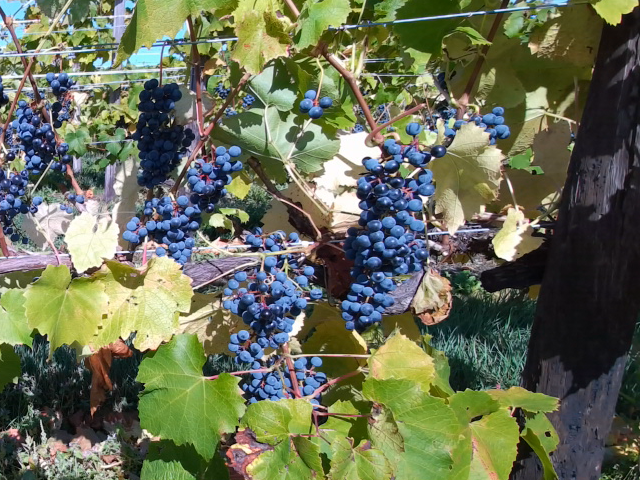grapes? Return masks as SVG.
<instances>
[{
  "label": "grapes",
  "instance_id": "obj_4",
  "mask_svg": "<svg viewBox=\"0 0 640 480\" xmlns=\"http://www.w3.org/2000/svg\"><path fill=\"white\" fill-rule=\"evenodd\" d=\"M183 98L176 83L158 87L156 79L147 80L139 94L138 110L142 112L132 138L137 141V157L143 168L136 179L139 187L153 189L167 178L181 156L193 147L195 134L178 123L167 126V114Z\"/></svg>",
  "mask_w": 640,
  "mask_h": 480
},
{
  "label": "grapes",
  "instance_id": "obj_9",
  "mask_svg": "<svg viewBox=\"0 0 640 480\" xmlns=\"http://www.w3.org/2000/svg\"><path fill=\"white\" fill-rule=\"evenodd\" d=\"M317 98V91L315 89H308L303 100L298 105V111L300 113H307V117L312 120H319L323 116V108H329L334 104V97L329 95L321 96L319 98V107L314 106Z\"/></svg>",
  "mask_w": 640,
  "mask_h": 480
},
{
  "label": "grapes",
  "instance_id": "obj_11",
  "mask_svg": "<svg viewBox=\"0 0 640 480\" xmlns=\"http://www.w3.org/2000/svg\"><path fill=\"white\" fill-rule=\"evenodd\" d=\"M283 237H287L288 236V240L289 241H300L301 237L295 233V232H291L289 235L285 230L282 229H278L277 232H274L273 234L269 235V238H267L265 240V246H266V251L267 252H279L282 250V246L279 245V240L281 239V236Z\"/></svg>",
  "mask_w": 640,
  "mask_h": 480
},
{
  "label": "grapes",
  "instance_id": "obj_8",
  "mask_svg": "<svg viewBox=\"0 0 640 480\" xmlns=\"http://www.w3.org/2000/svg\"><path fill=\"white\" fill-rule=\"evenodd\" d=\"M297 374L296 381H304V386H299V392L302 397L313 395L318 387L328 382V376L325 372H314L311 376L307 375L306 370L309 368V360L305 357H299L293 362Z\"/></svg>",
  "mask_w": 640,
  "mask_h": 480
},
{
  "label": "grapes",
  "instance_id": "obj_10",
  "mask_svg": "<svg viewBox=\"0 0 640 480\" xmlns=\"http://www.w3.org/2000/svg\"><path fill=\"white\" fill-rule=\"evenodd\" d=\"M46 80L49 83L52 94L56 97H61L64 92L74 85V81L69 79V75L66 72L59 73L57 76L53 72H48Z\"/></svg>",
  "mask_w": 640,
  "mask_h": 480
},
{
  "label": "grapes",
  "instance_id": "obj_6",
  "mask_svg": "<svg viewBox=\"0 0 640 480\" xmlns=\"http://www.w3.org/2000/svg\"><path fill=\"white\" fill-rule=\"evenodd\" d=\"M289 370L287 365L283 366L284 372L282 373V378L287 387L285 388L286 394L283 392L280 373L277 371L268 373H255L254 371H250L249 375L253 379L251 385L249 383H243L242 390L259 395L262 399H268L269 401L286 400L287 396L290 399H294V394L289 390L293 387L288 375Z\"/></svg>",
  "mask_w": 640,
  "mask_h": 480
},
{
  "label": "grapes",
  "instance_id": "obj_5",
  "mask_svg": "<svg viewBox=\"0 0 640 480\" xmlns=\"http://www.w3.org/2000/svg\"><path fill=\"white\" fill-rule=\"evenodd\" d=\"M18 109L15 111V119L10 123V127L17 130V136L23 141L21 150L26 153L24 169L20 171V175L11 172L8 179L7 171L0 168V192L6 190V195L0 193V220L6 227H10L12 222L9 219L17 216L20 212L32 214L39 212V207L43 204L41 197H34L31 200L33 206L24 204L22 198L14 195L24 196L25 188L29 185L28 177L30 173L37 176L47 168V164L54 158L60 157L61 161L54 160L49 164L52 171L59 173L66 172V164L71 161V155L66 153L70 145L67 142L56 146L55 138L52 133V127L44 124L41 128H37L41 124V117L35 114L32 107L27 106L25 100L17 102Z\"/></svg>",
  "mask_w": 640,
  "mask_h": 480
},
{
  "label": "grapes",
  "instance_id": "obj_14",
  "mask_svg": "<svg viewBox=\"0 0 640 480\" xmlns=\"http://www.w3.org/2000/svg\"><path fill=\"white\" fill-rule=\"evenodd\" d=\"M62 109V105L59 102H54L52 104V112H51V124L55 129H60L62 127V123L58 120L59 114L58 112Z\"/></svg>",
  "mask_w": 640,
  "mask_h": 480
},
{
  "label": "grapes",
  "instance_id": "obj_2",
  "mask_svg": "<svg viewBox=\"0 0 640 480\" xmlns=\"http://www.w3.org/2000/svg\"><path fill=\"white\" fill-rule=\"evenodd\" d=\"M287 258L290 269H298L300 263L296 261L293 254L281 257L265 258L264 270L269 271L275 280L268 286L266 283L257 284L251 282L247 287H241V283L248 279L246 271L238 270L234 273V278L227 282L228 287L223 290L225 297H231L236 291V298L224 300L222 307L229 310L231 314L242 318L243 323L255 331V341L251 342L247 349H243L241 344L247 343L250 333L245 329L238 330L236 334L229 336L227 350L231 354L237 353L233 357L235 364H251L254 370L261 368V359L265 350L278 349L280 344L286 343L290 338L295 323L294 317H299L302 310L307 308V300L302 296L299 287L310 285L309 277L315 274L312 266L305 267L304 275H297L294 283L287 280V273L280 270ZM256 292H263L270 295L264 302L257 303Z\"/></svg>",
  "mask_w": 640,
  "mask_h": 480
},
{
  "label": "grapes",
  "instance_id": "obj_3",
  "mask_svg": "<svg viewBox=\"0 0 640 480\" xmlns=\"http://www.w3.org/2000/svg\"><path fill=\"white\" fill-rule=\"evenodd\" d=\"M241 154V146L232 145L228 149L218 146L215 149L217 158L214 159V163H206L203 159L197 158L193 164L194 168L187 171L192 193L188 197L179 195L176 198V203L181 207L176 216L171 215L173 201L169 197L152 198L144 203L143 215L151 217L155 209L163 221L147 220L144 227H141V219L131 217L125 225L126 230L121 233V238L129 243L140 244L148 232L155 230V241L168 245L170 257L179 265L187 263V258L192 255V249L196 245V240L188 235L187 231H197L202 224V210L205 214H212L215 204L227 195L223 186L231 184L230 175L243 170V164L238 159L230 162V157L238 158Z\"/></svg>",
  "mask_w": 640,
  "mask_h": 480
},
{
  "label": "grapes",
  "instance_id": "obj_7",
  "mask_svg": "<svg viewBox=\"0 0 640 480\" xmlns=\"http://www.w3.org/2000/svg\"><path fill=\"white\" fill-rule=\"evenodd\" d=\"M505 109L502 106H495L492 113L474 115L468 113L467 117L471 122H476L477 127L486 128L485 132L489 134V144L494 145L499 140H506L511 136V128L505 123Z\"/></svg>",
  "mask_w": 640,
  "mask_h": 480
},
{
  "label": "grapes",
  "instance_id": "obj_13",
  "mask_svg": "<svg viewBox=\"0 0 640 480\" xmlns=\"http://www.w3.org/2000/svg\"><path fill=\"white\" fill-rule=\"evenodd\" d=\"M469 121L466 119H462V120H455L453 122V127H449V120L445 119L444 120V130H443V135L446 138H454L457 135L456 129L455 128H460L462 125H468Z\"/></svg>",
  "mask_w": 640,
  "mask_h": 480
},
{
  "label": "grapes",
  "instance_id": "obj_12",
  "mask_svg": "<svg viewBox=\"0 0 640 480\" xmlns=\"http://www.w3.org/2000/svg\"><path fill=\"white\" fill-rule=\"evenodd\" d=\"M263 233L264 229L261 226L254 227L252 234H248L245 237V243L251 244L252 247H260L263 244V238L261 237Z\"/></svg>",
  "mask_w": 640,
  "mask_h": 480
},
{
  "label": "grapes",
  "instance_id": "obj_1",
  "mask_svg": "<svg viewBox=\"0 0 640 480\" xmlns=\"http://www.w3.org/2000/svg\"><path fill=\"white\" fill-rule=\"evenodd\" d=\"M383 146L391 156L385 165L374 157H365L362 166L368 171L365 177L358 179L356 199L360 213L358 227L346 230L347 241L343 243L344 259L356 265L350 270V276L357 282L349 284L350 293L340 303L344 329L371 327L381 322L386 308H391L395 297L391 293L397 284L390 278L404 276L423 268V259L430 257L426 242L415 239L413 233H407L405 226L412 232H422L425 223L414 218L412 212H420L424 207L422 197H431L435 193L432 183L433 171L423 169L418 179L391 177L400 164L424 167L433 158H444L447 148L434 145L430 151L418 150L416 145H404L396 139H386ZM393 216H382L386 212Z\"/></svg>",
  "mask_w": 640,
  "mask_h": 480
}]
</instances>
